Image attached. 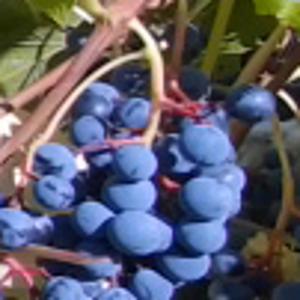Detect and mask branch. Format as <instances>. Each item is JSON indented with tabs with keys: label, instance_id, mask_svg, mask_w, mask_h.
Instances as JSON below:
<instances>
[{
	"label": "branch",
	"instance_id": "30e6481e",
	"mask_svg": "<svg viewBox=\"0 0 300 300\" xmlns=\"http://www.w3.org/2000/svg\"><path fill=\"white\" fill-rule=\"evenodd\" d=\"M143 3L144 0H120L95 27L83 48L53 64L11 96L0 99V117H3L52 86L46 98L26 116L12 138L0 146V166L6 165L12 156L24 148L44 119L59 107L68 89L84 75L88 64L107 53L106 47L115 43L118 34Z\"/></svg>",
	"mask_w": 300,
	"mask_h": 300
}]
</instances>
